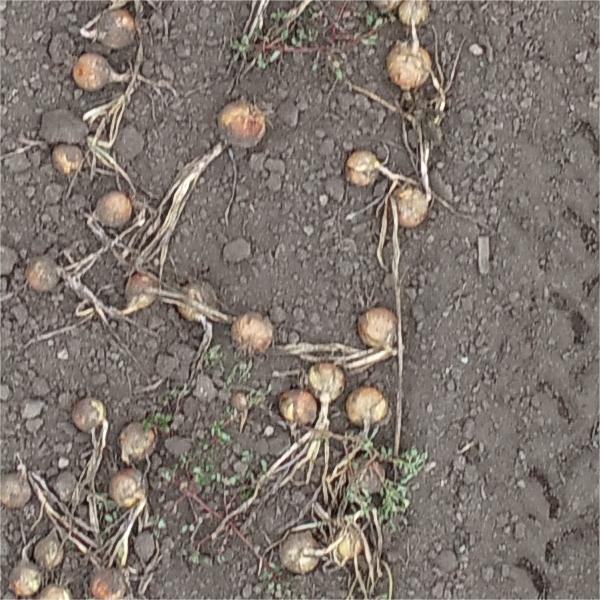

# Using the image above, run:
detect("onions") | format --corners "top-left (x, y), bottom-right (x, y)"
top-left (215, 101), bottom-right (265, 147)
top-left (358, 306), bottom-right (396, 345)
top-left (351, 458), bottom-right (384, 501)
top-left (343, 385), bottom-right (386, 424)
top-left (33, 537), bottom-right (63, 568)
top-left (70, 398), bottom-right (103, 432)
top-left (229, 312), bottom-right (269, 354)
top-left (385, 47), bottom-right (429, 88)
top-left (343, 149), bottom-right (378, 185)
top-left (99, 8), bottom-right (134, 47)
top-left (0, 477), bottom-right (29, 508)
top-left (181, 282), bottom-right (225, 322)
top-left (277, 390), bottom-right (317, 426)
top-left (93, 188), bottom-right (131, 225)
top-left (119, 269), bottom-right (155, 316)
top-left (38, 583), bottom-right (73, 599)
top-left (119, 421), bottom-right (155, 459)
top-left (326, 524), bottom-right (364, 562)
top-left (395, 1), bottom-right (429, 26)
top-left (393, 184), bottom-right (429, 228)
top-left (232, 390), bottom-right (250, 410)
top-left (306, 361), bottom-right (345, 400)
top-left (48, 143), bottom-right (83, 175)
top-left (370, 0), bottom-right (403, 13)
top-left (71, 52), bottom-right (108, 89)
top-left (83, 569), bottom-right (128, 599)
top-left (23, 255), bottom-right (58, 293)
top-left (9, 562), bottom-right (41, 595)
top-left (106, 470), bottom-right (142, 508)
top-left (279, 532), bottom-right (320, 574)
